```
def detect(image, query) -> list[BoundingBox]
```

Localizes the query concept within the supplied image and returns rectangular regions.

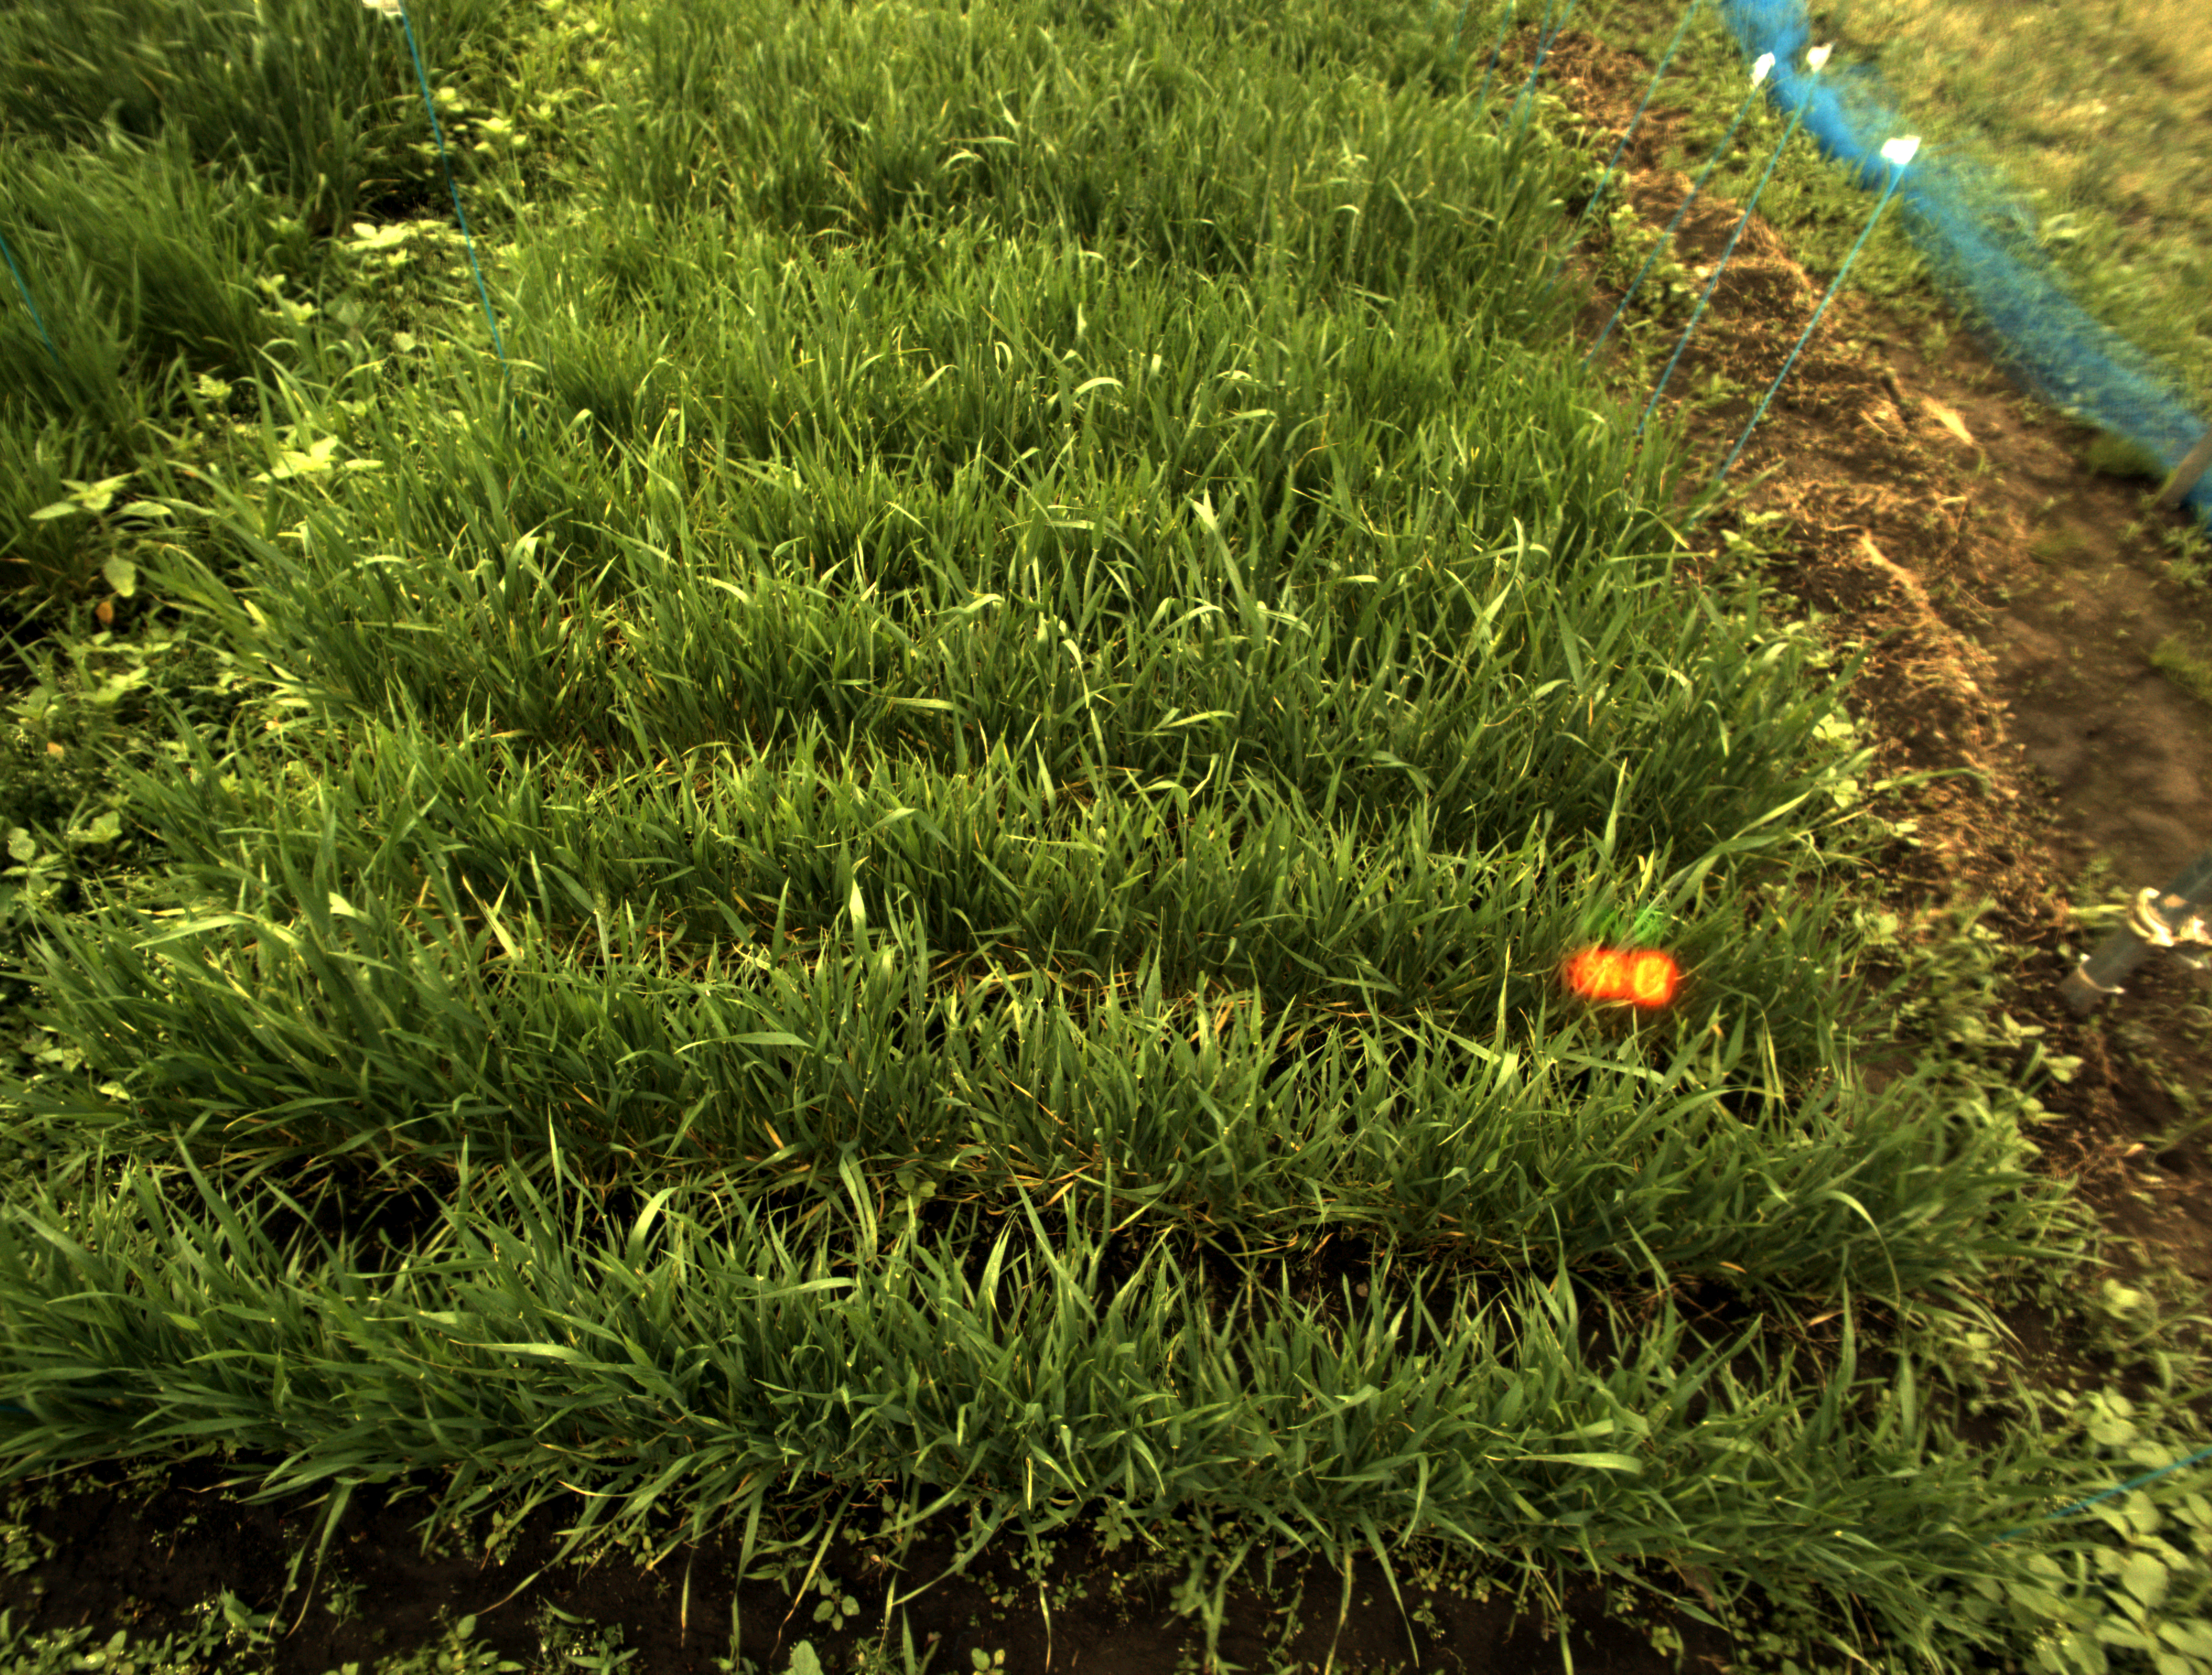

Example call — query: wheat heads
[595,892,611,931]
[1159,522,1176,562]
[294,959,323,1003]
[1351,170,1363,199]
[1587,701,1612,736]
[1487,629,1503,661]
[709,613,719,629]
[954,782,965,825]
[1579,658,1616,707]
[1690,1098,1708,1127]
[1013,388,1021,437]
[1007,358,1014,391]
[1646,1400,1669,1428]
[1458,609,1484,671]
